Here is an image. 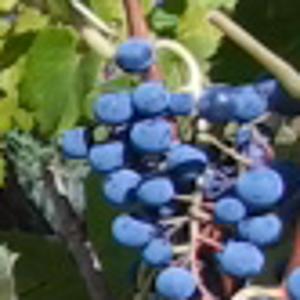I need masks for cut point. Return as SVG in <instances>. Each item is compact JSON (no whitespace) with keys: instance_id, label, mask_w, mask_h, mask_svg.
Here are the masks:
<instances>
[{"instance_id":"obj_1","label":"cut point","mask_w":300,"mask_h":300,"mask_svg":"<svg viewBox=\"0 0 300 300\" xmlns=\"http://www.w3.org/2000/svg\"><path fill=\"white\" fill-rule=\"evenodd\" d=\"M153 47L155 49L166 48L171 52L177 53L187 63L191 72V77L193 79H198L200 77L199 64L197 63L195 56L191 54L185 46L176 43L171 39H157L153 42Z\"/></svg>"}]
</instances>
